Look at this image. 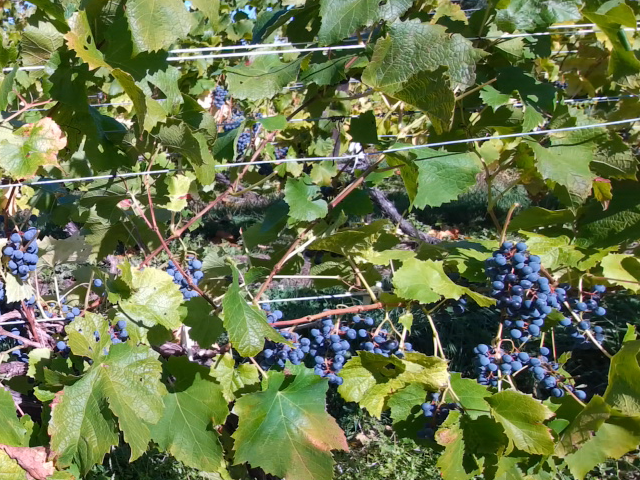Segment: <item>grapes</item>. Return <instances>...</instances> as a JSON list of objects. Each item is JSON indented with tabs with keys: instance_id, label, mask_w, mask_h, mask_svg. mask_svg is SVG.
<instances>
[{
	"instance_id": "1",
	"label": "grapes",
	"mask_w": 640,
	"mask_h": 480,
	"mask_svg": "<svg viewBox=\"0 0 640 480\" xmlns=\"http://www.w3.org/2000/svg\"><path fill=\"white\" fill-rule=\"evenodd\" d=\"M541 256L528 254L524 242L504 241L485 262L492 280L489 295L497 305H505L509 318L503 320L515 340L539 337L544 320L553 310H560L567 299L570 284L562 282L553 291L546 276L539 274Z\"/></svg>"
},
{
	"instance_id": "2",
	"label": "grapes",
	"mask_w": 640,
	"mask_h": 480,
	"mask_svg": "<svg viewBox=\"0 0 640 480\" xmlns=\"http://www.w3.org/2000/svg\"><path fill=\"white\" fill-rule=\"evenodd\" d=\"M334 317L321 318L322 332L318 328H312L310 334L314 336L316 342H311L308 337H303L301 334L291 332L285 329H278L277 334L282 340L288 341L295 349L285 345L281 342H277L274 345V349H265L257 356V361L260 363V368L266 370L269 366H274L277 362L279 367H285L288 361L295 365H302L303 359L307 357V353L314 357V373L322 377L330 378V382L336 385H342L344 379L342 376L337 375L339 370L342 369L346 362V358H351L352 343L348 340L341 338L336 333H330L335 328ZM325 340L330 344V350L336 355L332 363L334 372H325L324 363L325 359L321 355H317V349L325 346Z\"/></svg>"
},
{
	"instance_id": "3",
	"label": "grapes",
	"mask_w": 640,
	"mask_h": 480,
	"mask_svg": "<svg viewBox=\"0 0 640 480\" xmlns=\"http://www.w3.org/2000/svg\"><path fill=\"white\" fill-rule=\"evenodd\" d=\"M494 348L488 344H479L473 349V354L477 356L475 366L479 371L477 374V380L485 386L497 387L499 385L498 369L503 375H513L514 371H520L523 365L529 367V372L534 376L539 384H542V389L547 392L549 399H563L565 397V390L557 385V378L551 374H547V369L544 366H550L553 371L559 370L558 361H549L547 356L550 354V349L547 346H540L538 348L537 358H530V355L526 352L508 353L506 348L499 350L500 365L497 364L496 358L492 356Z\"/></svg>"
},
{
	"instance_id": "4",
	"label": "grapes",
	"mask_w": 640,
	"mask_h": 480,
	"mask_svg": "<svg viewBox=\"0 0 640 480\" xmlns=\"http://www.w3.org/2000/svg\"><path fill=\"white\" fill-rule=\"evenodd\" d=\"M37 229L27 228L24 234L11 233L10 244L3 247L2 255L9 257L7 271L16 274L22 280L29 278L38 264L39 242L35 239Z\"/></svg>"
},
{
	"instance_id": "5",
	"label": "grapes",
	"mask_w": 640,
	"mask_h": 480,
	"mask_svg": "<svg viewBox=\"0 0 640 480\" xmlns=\"http://www.w3.org/2000/svg\"><path fill=\"white\" fill-rule=\"evenodd\" d=\"M388 331L386 329H380L378 334L374 336V342L379 344V347H375L372 341L363 340L359 343V347L363 351H370L371 355H382L385 358H390L392 353L395 357H401L402 352L396 348L399 347V341L392 339L389 340Z\"/></svg>"
},
{
	"instance_id": "6",
	"label": "grapes",
	"mask_w": 640,
	"mask_h": 480,
	"mask_svg": "<svg viewBox=\"0 0 640 480\" xmlns=\"http://www.w3.org/2000/svg\"><path fill=\"white\" fill-rule=\"evenodd\" d=\"M168 266L169 267L165 268V272L171 275L173 283L175 285H178V290L182 293V298L184 300H190L191 298L198 297V293L187 281L182 278L181 274L171 261L168 262Z\"/></svg>"
},
{
	"instance_id": "7",
	"label": "grapes",
	"mask_w": 640,
	"mask_h": 480,
	"mask_svg": "<svg viewBox=\"0 0 640 480\" xmlns=\"http://www.w3.org/2000/svg\"><path fill=\"white\" fill-rule=\"evenodd\" d=\"M202 261L194 256H188L186 258V271L193 277L198 283L205 278L204 272L201 270Z\"/></svg>"
},
{
	"instance_id": "8",
	"label": "grapes",
	"mask_w": 640,
	"mask_h": 480,
	"mask_svg": "<svg viewBox=\"0 0 640 480\" xmlns=\"http://www.w3.org/2000/svg\"><path fill=\"white\" fill-rule=\"evenodd\" d=\"M576 309L580 312H585L589 309L598 317H605L607 315V308L605 306H598V302L594 298H587L584 302H578Z\"/></svg>"
},
{
	"instance_id": "9",
	"label": "grapes",
	"mask_w": 640,
	"mask_h": 480,
	"mask_svg": "<svg viewBox=\"0 0 640 480\" xmlns=\"http://www.w3.org/2000/svg\"><path fill=\"white\" fill-rule=\"evenodd\" d=\"M559 324L565 328H568V335L572 338H577L579 343H584L586 341V335L584 333H579L577 327L573 324V319L571 317H561L559 319Z\"/></svg>"
},
{
	"instance_id": "10",
	"label": "grapes",
	"mask_w": 640,
	"mask_h": 480,
	"mask_svg": "<svg viewBox=\"0 0 640 480\" xmlns=\"http://www.w3.org/2000/svg\"><path fill=\"white\" fill-rule=\"evenodd\" d=\"M340 330L341 331H345V336L348 339L355 340L357 338V335L360 338H367L368 337V332L364 328H359L358 331H357L355 328H350L349 326H341Z\"/></svg>"
},
{
	"instance_id": "11",
	"label": "grapes",
	"mask_w": 640,
	"mask_h": 480,
	"mask_svg": "<svg viewBox=\"0 0 640 480\" xmlns=\"http://www.w3.org/2000/svg\"><path fill=\"white\" fill-rule=\"evenodd\" d=\"M261 309L265 310L266 319H267L268 323H270L272 321H278V320H281L283 318V311L282 310H274L271 313V309H270V306H269L268 302H263L262 305H261Z\"/></svg>"
},
{
	"instance_id": "12",
	"label": "grapes",
	"mask_w": 640,
	"mask_h": 480,
	"mask_svg": "<svg viewBox=\"0 0 640 480\" xmlns=\"http://www.w3.org/2000/svg\"><path fill=\"white\" fill-rule=\"evenodd\" d=\"M66 302H67L66 298H62L61 301H60V305L63 306L62 307V311L64 313H67L65 315V319L67 321H73L74 318L77 317L80 314V308L79 307H73L71 309V313H68L69 312V307L68 306H64Z\"/></svg>"
},
{
	"instance_id": "13",
	"label": "grapes",
	"mask_w": 640,
	"mask_h": 480,
	"mask_svg": "<svg viewBox=\"0 0 640 480\" xmlns=\"http://www.w3.org/2000/svg\"><path fill=\"white\" fill-rule=\"evenodd\" d=\"M117 328L119 329L117 331V334L119 335L120 338H126L128 336V331L126 330V326H127V322L124 320H119L116 323Z\"/></svg>"
},
{
	"instance_id": "14",
	"label": "grapes",
	"mask_w": 640,
	"mask_h": 480,
	"mask_svg": "<svg viewBox=\"0 0 640 480\" xmlns=\"http://www.w3.org/2000/svg\"><path fill=\"white\" fill-rule=\"evenodd\" d=\"M422 409L424 410L423 414L426 417H431V416L434 415V411L436 409V406L433 405L432 403H429V402H423L422 403Z\"/></svg>"
},
{
	"instance_id": "15",
	"label": "grapes",
	"mask_w": 640,
	"mask_h": 480,
	"mask_svg": "<svg viewBox=\"0 0 640 480\" xmlns=\"http://www.w3.org/2000/svg\"><path fill=\"white\" fill-rule=\"evenodd\" d=\"M26 304L28 305L29 308H31L33 310H38L39 309V306L36 305L35 296L34 295H31L29 297V299L26 301Z\"/></svg>"
}]
</instances>
